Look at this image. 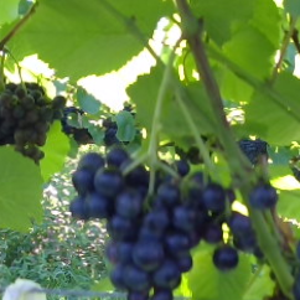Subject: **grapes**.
Wrapping results in <instances>:
<instances>
[{
  "mask_svg": "<svg viewBox=\"0 0 300 300\" xmlns=\"http://www.w3.org/2000/svg\"><path fill=\"white\" fill-rule=\"evenodd\" d=\"M127 146L112 147L104 158L84 154L71 177L77 192L70 209L79 220L107 218L111 239L105 255L113 263L108 278L129 291L128 300H172V290L189 272V249L202 237L221 247L212 262L223 272L234 270L239 253L251 254L259 237L251 218L230 210L234 192L212 183L204 171L192 174L184 161H158L146 169L135 163Z\"/></svg>",
  "mask_w": 300,
  "mask_h": 300,
  "instance_id": "01657485",
  "label": "grapes"
},
{
  "mask_svg": "<svg viewBox=\"0 0 300 300\" xmlns=\"http://www.w3.org/2000/svg\"><path fill=\"white\" fill-rule=\"evenodd\" d=\"M66 98L44 96L37 82L7 83L0 94V145L10 144L18 153L34 162L45 157L41 149L54 119L64 117Z\"/></svg>",
  "mask_w": 300,
  "mask_h": 300,
  "instance_id": "b958b902",
  "label": "grapes"
}]
</instances>
